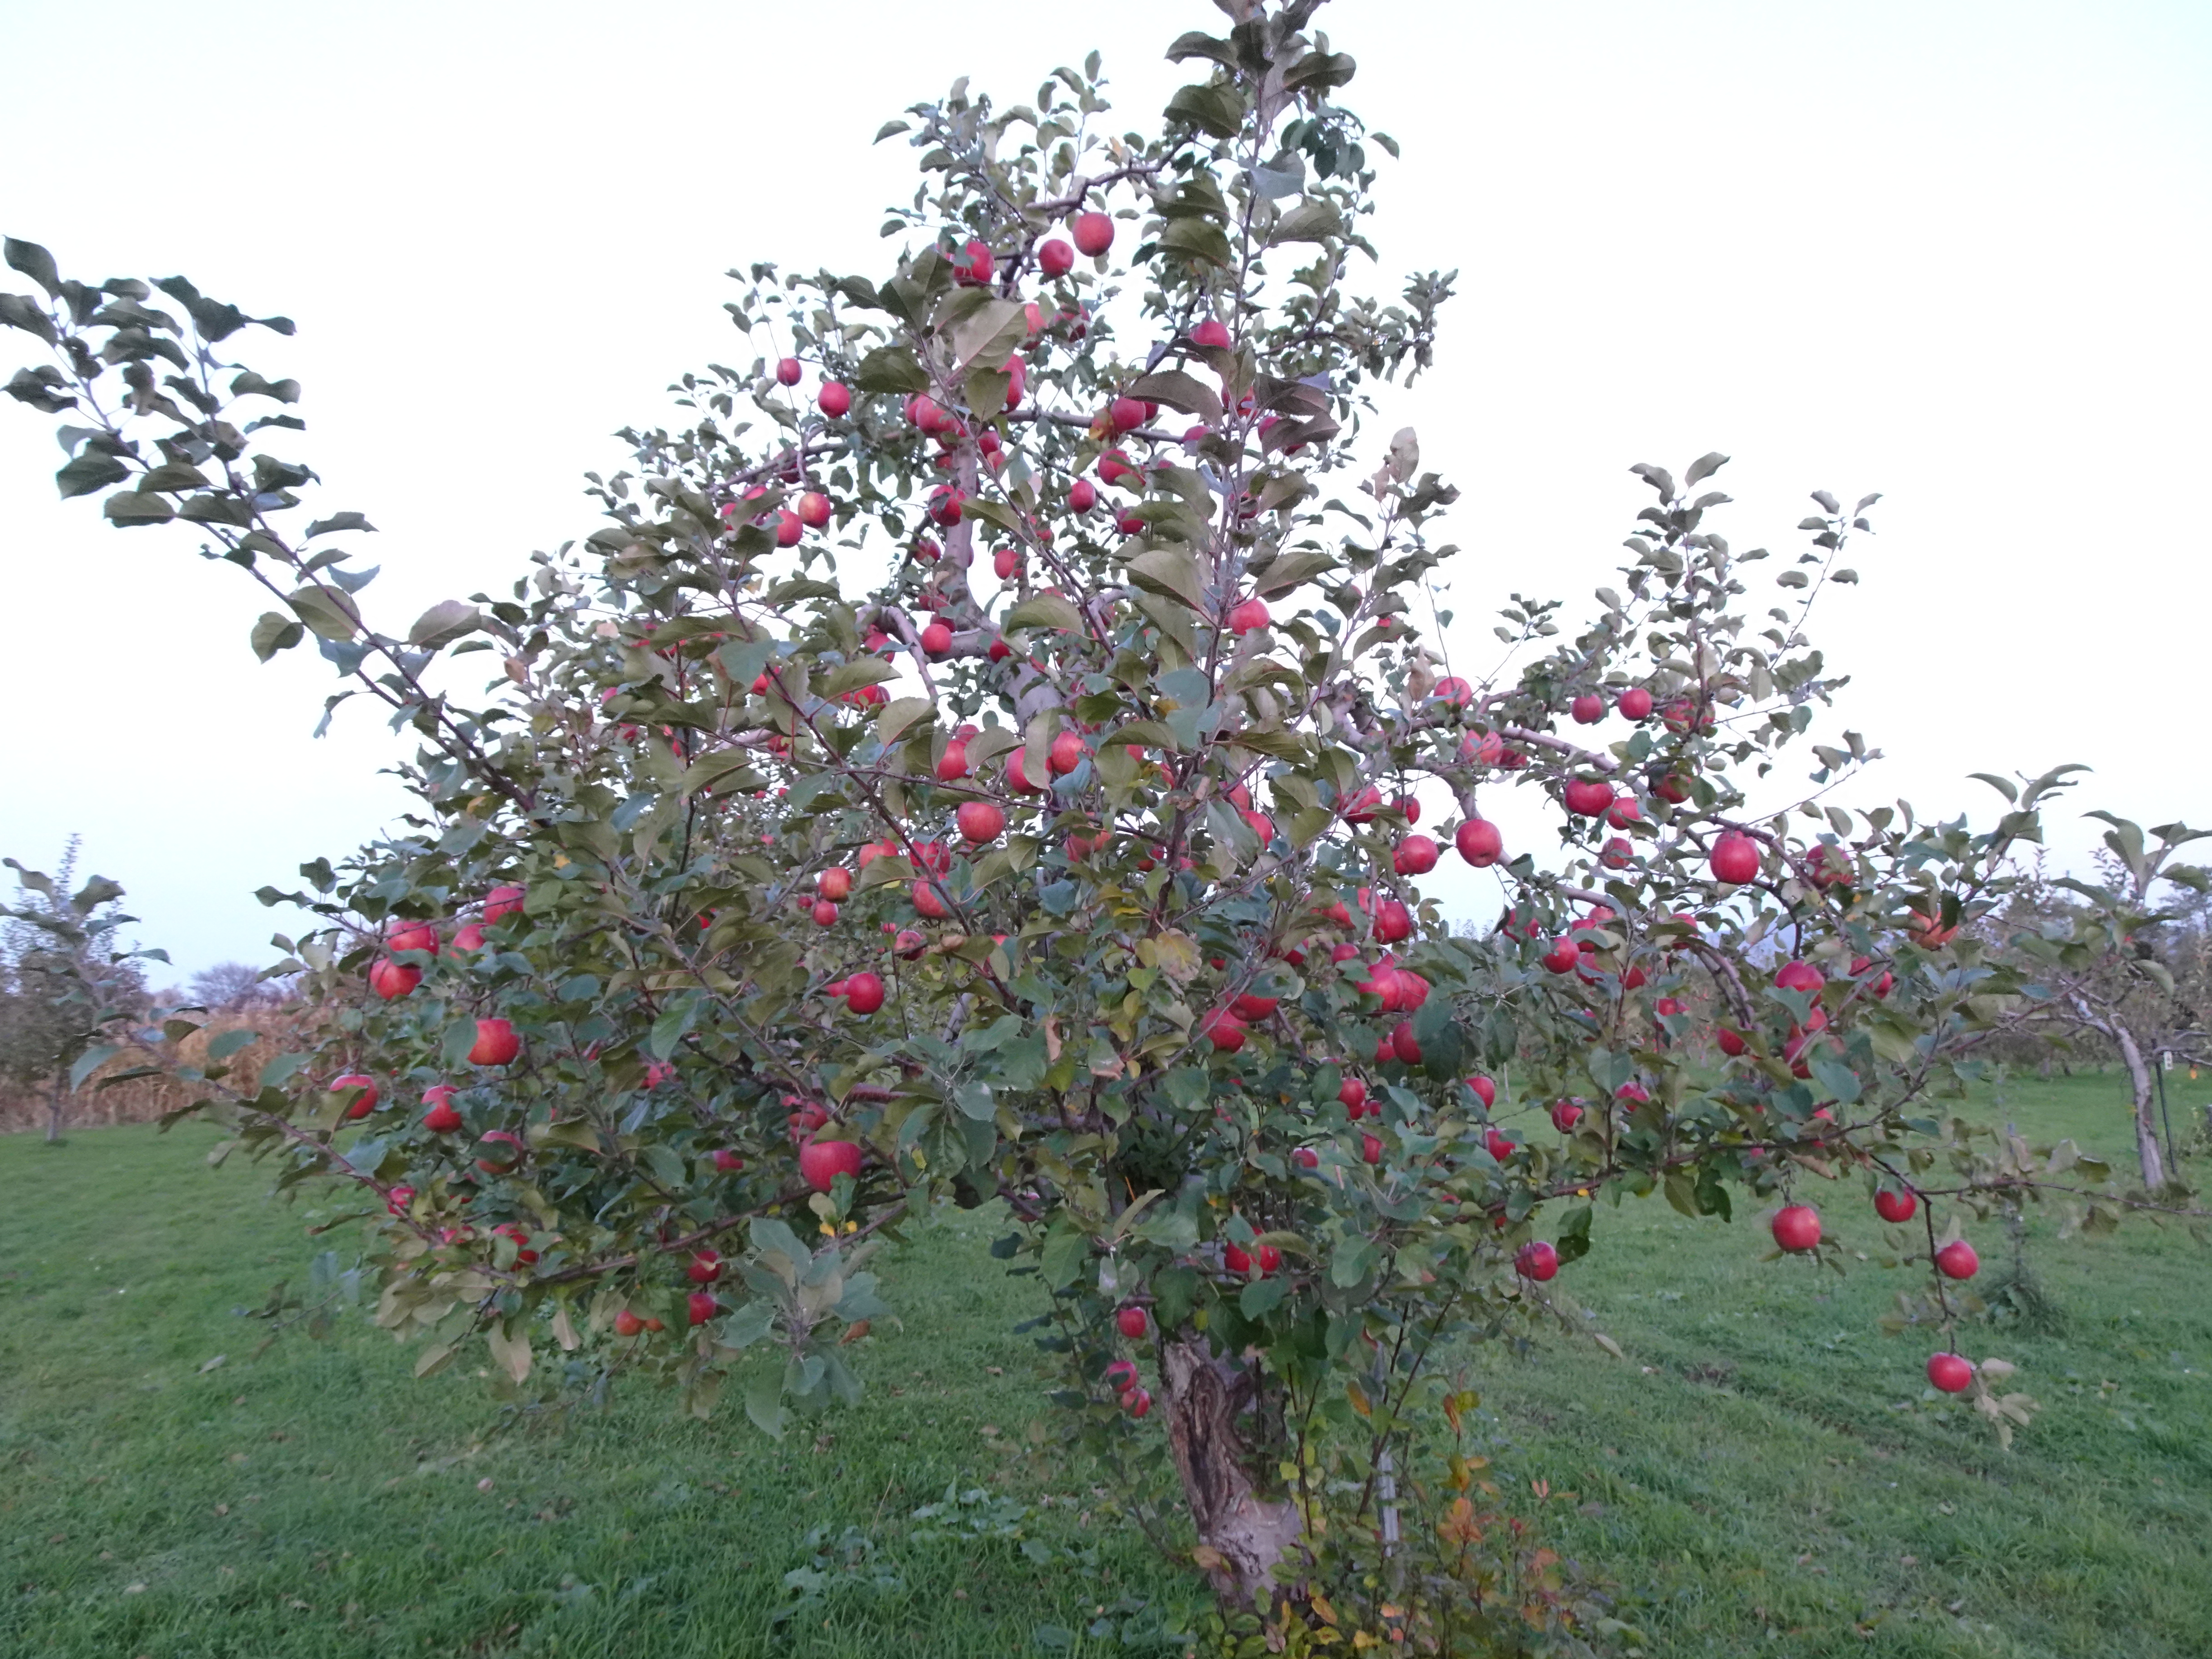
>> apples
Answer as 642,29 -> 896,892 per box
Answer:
1372,901 -> 1410,945
1328,1058 -> 1338,1063
935,245 -> 950,261
581,1043 -> 599,1060
813,898 -> 838,927
1602,837 -> 1633,870
1179,841 -> 1198,870
1908,909 -> 1958,950
894,931 -> 925,961
421,1085 -> 462,1134
1218,781 -> 1250,811
953,241 -> 995,288
1346,1105 -> 1363,1120
1223,592 -> 1245,626
1258,416 -> 1282,441
1543,935 -> 1580,974
930,613 -> 956,633
1494,1216 -> 1507,1229
1008,353 -> 1026,383
1442,1193 -> 1461,1204
1663,698 -> 1694,733
1239,810 -> 1273,851
1211,1107 -> 1232,1135
1771,1206 -> 1820,1253
1552,1099 -> 1584,1134
1357,887 -> 1385,926
638,1077 -> 650,1090
1057,629 -> 1080,647
1258,941 -> 1279,960
918,581 -> 933,611
1338,1078 -> 1366,1108
687,1293 -> 716,1325
1789,1007 -> 1828,1042
1702,706 -> 1715,724
1055,645 -> 1068,651
1292,1147 -> 1318,1168
788,1099 -> 805,1127
859,837 -> 899,870
1392,850 -> 1409,876
1671,913 -> 1698,950
864,634 -> 895,663
929,485 -> 966,526
915,395 -> 954,438
937,739 -> 972,783
978,431 -> 998,459
1282,443 -> 1307,456
1433,677 -> 1472,707
994,549 -> 1023,580
935,419 -> 967,451
613,723 -> 638,745
386,921 -> 439,957
1355,964 -> 1404,1015
766,735 -> 789,753
1017,1193 -> 1040,1222
1784,1036 -> 1814,1079
1022,303 -> 1048,351
934,594 -> 948,614
1055,655 -> 1065,668
1619,966 -> 1646,989
1225,990 -> 1278,1021
1400,835 -> 1438,874
1092,408 -> 1122,443
1456,819 -> 1502,868
841,683 -> 878,711
1229,599 -> 1270,635
1068,480 -> 1095,514
1106,1361 -> 1138,1392
467,1019 -> 519,1066
822,979 -> 846,998
712,1150 -> 743,1172
1849,955 -> 1891,1002
1331,943 -> 1360,974
1380,953 -> 1404,969
1071,682 -> 1086,709
1499,748 -> 1527,771
909,839 -> 950,873
1565,778 -> 1614,818
914,539 -> 941,566
818,867 -> 855,903
921,624 -> 952,655
752,666 -> 781,696
1089,605 -> 1115,627
1503,908 -> 1538,944
1483,1129 -> 1515,1162
1221,383 -> 1251,411
775,510 -> 803,548
1571,694 -> 1602,724
1132,466 -> 1146,487
1717,1021 -> 1750,1057
1812,1108 -> 1834,1149
1120,508 -> 1144,534
492,1223 -> 539,1272
986,450 -> 1007,471
1098,449 -> 1133,486
1327,901 -> 1356,930
997,362 -> 1024,414
1395,969 -> 1430,1012
797,896 -> 815,909
1063,838 -> 1079,863
742,486 -> 769,516
443,1225 -> 473,1244
1715,830 -> 1756,846
1200,1007 -> 1248,1054
1282,938 -> 1309,966
1390,797 -> 1420,825
1183,425 -> 1211,444
720,502 -> 735,530
1111,397 -> 1146,431
1463,1076 -> 1495,1110
1145,401 -> 1159,420
1806,844 -> 1852,889
818,381 -> 850,418
1362,1134 -> 1383,1164
329,1074 -> 378,1120
1006,746 -> 1052,796
966,545 -> 974,567
1029,515 -> 1038,527
450,923 -> 493,959
1874,1185 -> 1916,1222
1225,1079 -> 1242,1098
912,873 -> 954,918
1607,797 -> 1641,830
864,624 -> 880,641
1071,716 -> 1101,735
957,801 -> 1004,844
777,751 -> 788,762
1754,1106 -> 1763,1113
1125,745 -> 1144,763
958,839 -> 984,864
1775,960 -> 1824,1009
663,724 -> 682,759
1335,785 -> 1382,823
1211,957 -> 1226,970
1303,892 -> 1330,917
1370,1100 -> 1382,1117
1030,656 -> 1045,671
602,687 -> 617,705
875,686 -> 890,710
844,972 -> 884,1014
1359,1098 -> 1367,1110
1187,331 -> 1203,362
800,1132 -> 861,1194
937,456 -> 952,470
1377,617 -> 1401,643
1070,812 -> 1112,861
1936,1240 -> 1978,1280
1121,1389 -> 1150,1418
1159,762 -> 1175,791
1652,997 -> 1690,1031
973,935 -> 1009,979
1157,459 -> 1177,470
1132,831 -> 1164,872
1750,1148 -> 1764,1158
751,515 -> 764,526
387,1186 -> 415,1216
483,885 -> 526,925
1039,239 -> 1074,278
648,1062 -> 672,1089
1043,586 -> 1065,599
1927,1352 -> 1971,1393
1117,1307 -> 1147,1338
955,724 -> 979,743
1461,729 -> 1503,766
1035,528 -> 1052,542
790,1126 -> 806,1143
1237,408 -> 1258,420
1350,584 -> 1362,610
1619,688 -> 1652,721
446,1170 -> 476,1204
782,1095 -> 796,1105
1072,212 -> 1114,257
1581,1009 -> 1597,1042
803,1101 -> 827,1130
1229,490 -> 1259,519
1616,1081 -> 1649,1112
645,1318 -> 665,1332
1710,838 -> 1760,884
1193,321 -> 1231,349
688,1250 -> 721,1283
798,492 -> 830,528
631,624 -> 657,648
777,358 -> 802,386
1576,952 -> 1605,986
1054,303 -> 1089,343
989,633 -> 1013,664
1374,1032 -> 1396,1063
1224,1226 -> 1280,1282
1393,1020 -> 1423,1065
1569,919 -> 1601,953
655,638 -> 685,657
710,633 -> 722,637
775,450 -> 806,484
696,908 -> 717,929
370,957 -> 423,1000
1588,906 -> 1616,929
1051,731 -> 1095,775
615,1310 -> 643,1337
1515,1241 -> 1558,1282
1654,773 -> 1692,804
904,393 -> 929,427
1091,627 -> 1098,638
476,1130 -> 523,1174
1750,1055 -> 1761,1059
